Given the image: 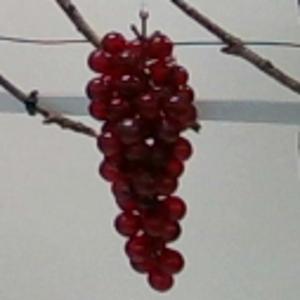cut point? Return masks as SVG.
Segmentation results:
<instances>
[{"instance_id":"1","label":"cut point","mask_w":300,"mask_h":300,"mask_svg":"<svg viewBox=\"0 0 300 300\" xmlns=\"http://www.w3.org/2000/svg\"><path fill=\"white\" fill-rule=\"evenodd\" d=\"M151 12L148 6V0H141V8L138 9V18L141 22L140 27V40L147 42L148 37V27L150 21Z\"/></svg>"}]
</instances>
